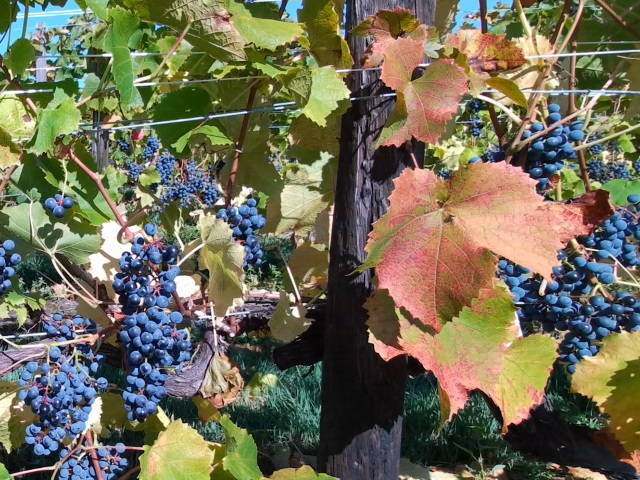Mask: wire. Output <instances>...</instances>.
Masks as SVG:
<instances>
[{
  "label": "wire",
  "mask_w": 640,
  "mask_h": 480,
  "mask_svg": "<svg viewBox=\"0 0 640 480\" xmlns=\"http://www.w3.org/2000/svg\"><path fill=\"white\" fill-rule=\"evenodd\" d=\"M297 107H298V104L294 103L289 105L267 106V107L253 108V109H247V110L230 111V112L215 113V114H204L199 117H183V118L161 120L156 122L134 123V124L125 125V126L95 127L88 130H71V131L61 130L60 135L61 136L90 135L98 132L127 131V130H132L137 128L158 127L163 125L185 123V122H201L206 119H217V118H225V117H232V116L249 115V114L264 113L269 111L291 110V109H296Z\"/></svg>",
  "instance_id": "1"
},
{
  "label": "wire",
  "mask_w": 640,
  "mask_h": 480,
  "mask_svg": "<svg viewBox=\"0 0 640 480\" xmlns=\"http://www.w3.org/2000/svg\"><path fill=\"white\" fill-rule=\"evenodd\" d=\"M267 74H241L233 77H222V78H197V79H187V80H163V81H153L151 83H135V88H154L155 86H165V85H189V84H199V83H225V82H235L238 80L244 79H266Z\"/></svg>",
  "instance_id": "2"
},
{
  "label": "wire",
  "mask_w": 640,
  "mask_h": 480,
  "mask_svg": "<svg viewBox=\"0 0 640 480\" xmlns=\"http://www.w3.org/2000/svg\"><path fill=\"white\" fill-rule=\"evenodd\" d=\"M568 92L577 95H604V94H640V89H601V90H579L571 87L545 88V89H525L523 95L527 94H547Z\"/></svg>",
  "instance_id": "3"
},
{
  "label": "wire",
  "mask_w": 640,
  "mask_h": 480,
  "mask_svg": "<svg viewBox=\"0 0 640 480\" xmlns=\"http://www.w3.org/2000/svg\"><path fill=\"white\" fill-rule=\"evenodd\" d=\"M640 53V48H631V49H613V50H595L593 52L590 51H569L565 53H544V54H536L534 56L526 55L525 59L528 61H536L538 59H546V58H567L572 56H588L595 57L598 55H616V54H633Z\"/></svg>",
  "instance_id": "4"
},
{
  "label": "wire",
  "mask_w": 640,
  "mask_h": 480,
  "mask_svg": "<svg viewBox=\"0 0 640 480\" xmlns=\"http://www.w3.org/2000/svg\"><path fill=\"white\" fill-rule=\"evenodd\" d=\"M54 91L53 87L44 88V89H19V90H9V91H0V96H12V95H33V94H47L52 93Z\"/></svg>",
  "instance_id": "5"
},
{
  "label": "wire",
  "mask_w": 640,
  "mask_h": 480,
  "mask_svg": "<svg viewBox=\"0 0 640 480\" xmlns=\"http://www.w3.org/2000/svg\"><path fill=\"white\" fill-rule=\"evenodd\" d=\"M276 311H277L276 307L240 310V311L229 312L227 314V317L231 318V317L242 316V315H252V314H260V313L276 312Z\"/></svg>",
  "instance_id": "6"
},
{
  "label": "wire",
  "mask_w": 640,
  "mask_h": 480,
  "mask_svg": "<svg viewBox=\"0 0 640 480\" xmlns=\"http://www.w3.org/2000/svg\"><path fill=\"white\" fill-rule=\"evenodd\" d=\"M46 335H47L46 331L34 332V333H25V334H14V335L0 334V339L16 340V339L45 337Z\"/></svg>",
  "instance_id": "7"
},
{
  "label": "wire",
  "mask_w": 640,
  "mask_h": 480,
  "mask_svg": "<svg viewBox=\"0 0 640 480\" xmlns=\"http://www.w3.org/2000/svg\"><path fill=\"white\" fill-rule=\"evenodd\" d=\"M397 96H398L397 92L377 93V94H372V95H367V96H362V97H352L351 101L352 102H364V101H370V100L379 99V98H392V97H397Z\"/></svg>",
  "instance_id": "8"
},
{
  "label": "wire",
  "mask_w": 640,
  "mask_h": 480,
  "mask_svg": "<svg viewBox=\"0 0 640 480\" xmlns=\"http://www.w3.org/2000/svg\"><path fill=\"white\" fill-rule=\"evenodd\" d=\"M380 70H381L380 66H367L364 68H356V69L337 68L336 72L345 73V74H359V73H366L369 71H380Z\"/></svg>",
  "instance_id": "9"
}]
</instances>
